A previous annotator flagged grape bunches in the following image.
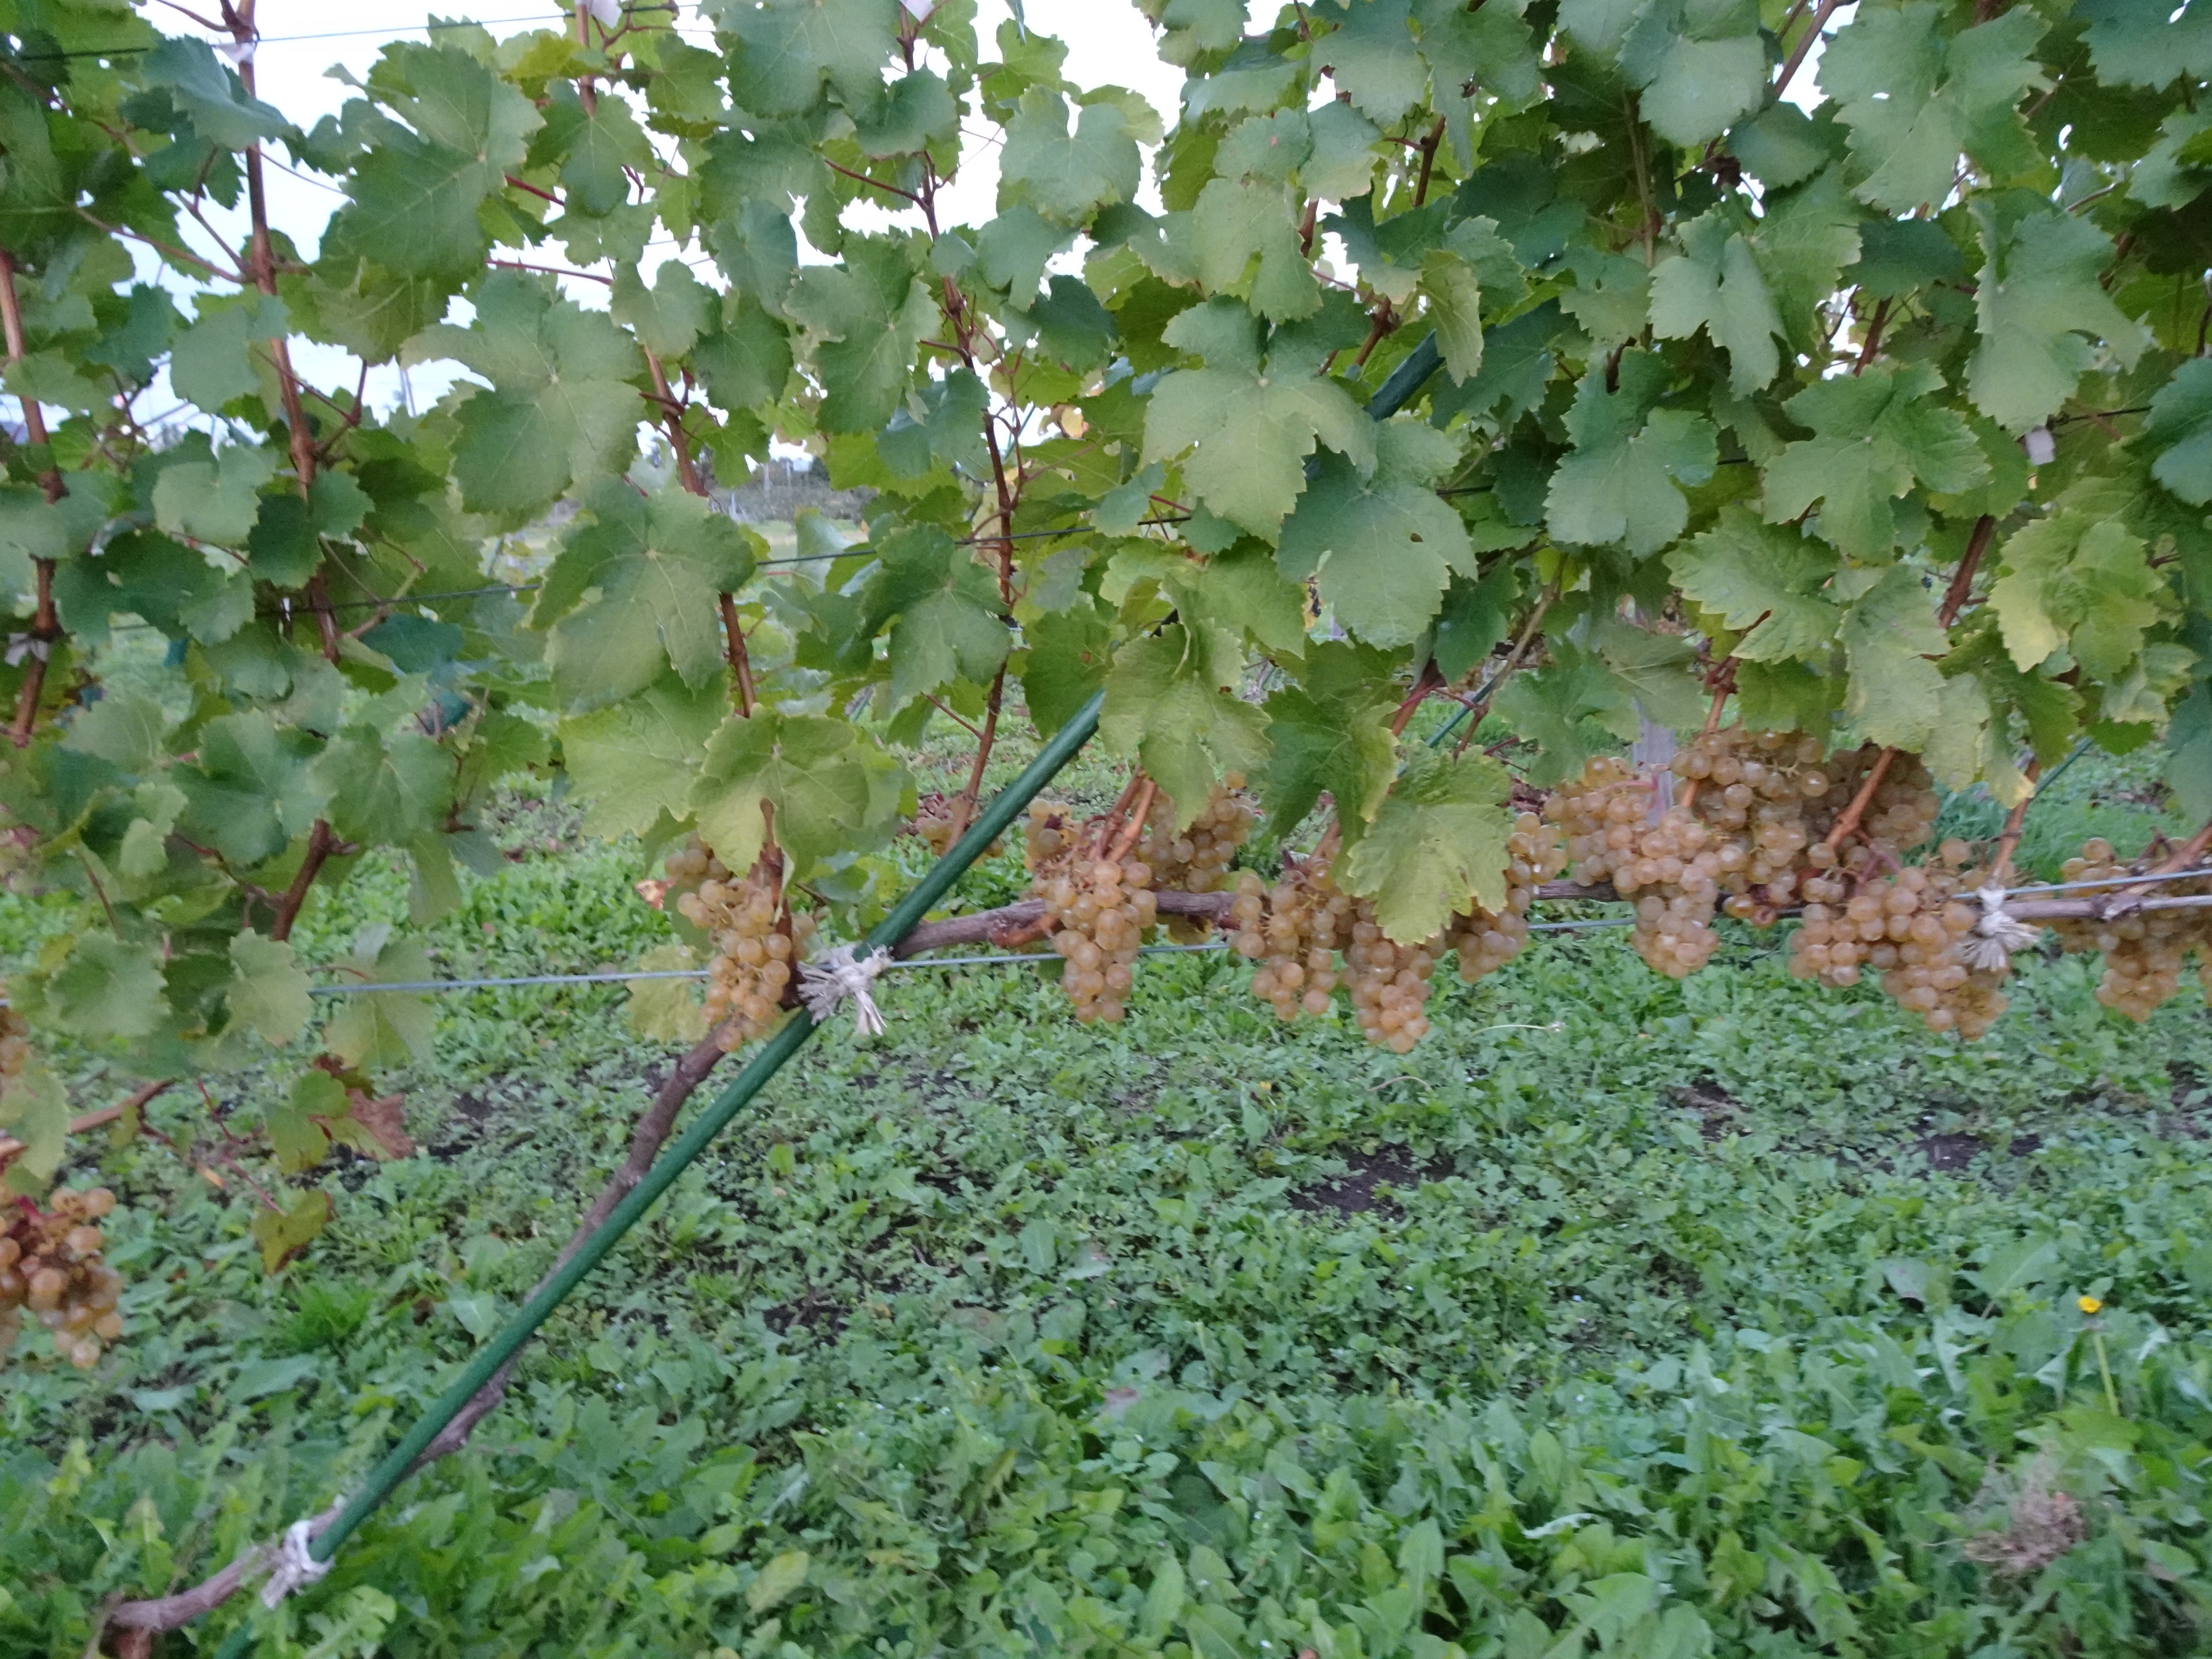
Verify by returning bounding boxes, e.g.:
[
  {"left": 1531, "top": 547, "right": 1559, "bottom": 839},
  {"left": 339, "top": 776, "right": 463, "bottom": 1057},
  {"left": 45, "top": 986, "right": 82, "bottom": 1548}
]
[
  {"left": 1860, "top": 744, "right": 1943, "bottom": 852},
  {"left": 780, "top": 910, "right": 818, "bottom": 964},
  {"left": 1512, "top": 808, "right": 1569, "bottom": 890},
  {"left": 1614, "top": 805, "right": 1721, "bottom": 981},
  {"left": 2, "top": 1000, "right": 33, "bottom": 1081},
  {"left": 1126, "top": 784, "right": 1185, "bottom": 883},
  {"left": 1023, "top": 795, "right": 1103, "bottom": 896},
  {"left": 1051, "top": 860, "right": 1162, "bottom": 1026},
  {"left": 1927, "top": 841, "right": 2021, "bottom": 888},
  {"left": 1449, "top": 834, "right": 1534, "bottom": 982},
  {"left": 2025, "top": 909, "right": 2193, "bottom": 953},
  {"left": 2155, "top": 837, "right": 2212, "bottom": 897},
  {"left": 1183, "top": 770, "right": 1259, "bottom": 889},
  {"left": 2088, "top": 939, "right": 2187, "bottom": 1023},
  {"left": 1851, "top": 864, "right": 1976, "bottom": 1033},
  {"left": 1718, "top": 812, "right": 1809, "bottom": 934},
  {"left": 2192, "top": 926, "right": 2212, "bottom": 1026},
  {"left": 1445, "top": 658, "right": 1491, "bottom": 702},
  {"left": 1665, "top": 719, "right": 1836, "bottom": 827},
  {"left": 1542, "top": 750, "right": 1659, "bottom": 889},
  {"left": 1790, "top": 837, "right": 1869, "bottom": 991},
  {"left": 678, "top": 880, "right": 791, "bottom": 1055},
  {"left": 1236, "top": 867, "right": 1354, "bottom": 1020},
  {"left": 2, "top": 1177, "right": 131, "bottom": 1371},
  {"left": 2009, "top": 834, "right": 2129, "bottom": 897},
  {"left": 1955, "top": 943, "right": 2016, "bottom": 1044},
  {"left": 1632, "top": 590, "right": 1693, "bottom": 637},
  {"left": 1308, "top": 838, "right": 1353, "bottom": 895},
  {"left": 914, "top": 799, "right": 1003, "bottom": 866},
  {"left": 663, "top": 827, "right": 735, "bottom": 881},
  {"left": 1339, "top": 899, "right": 1448, "bottom": 1059}
]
